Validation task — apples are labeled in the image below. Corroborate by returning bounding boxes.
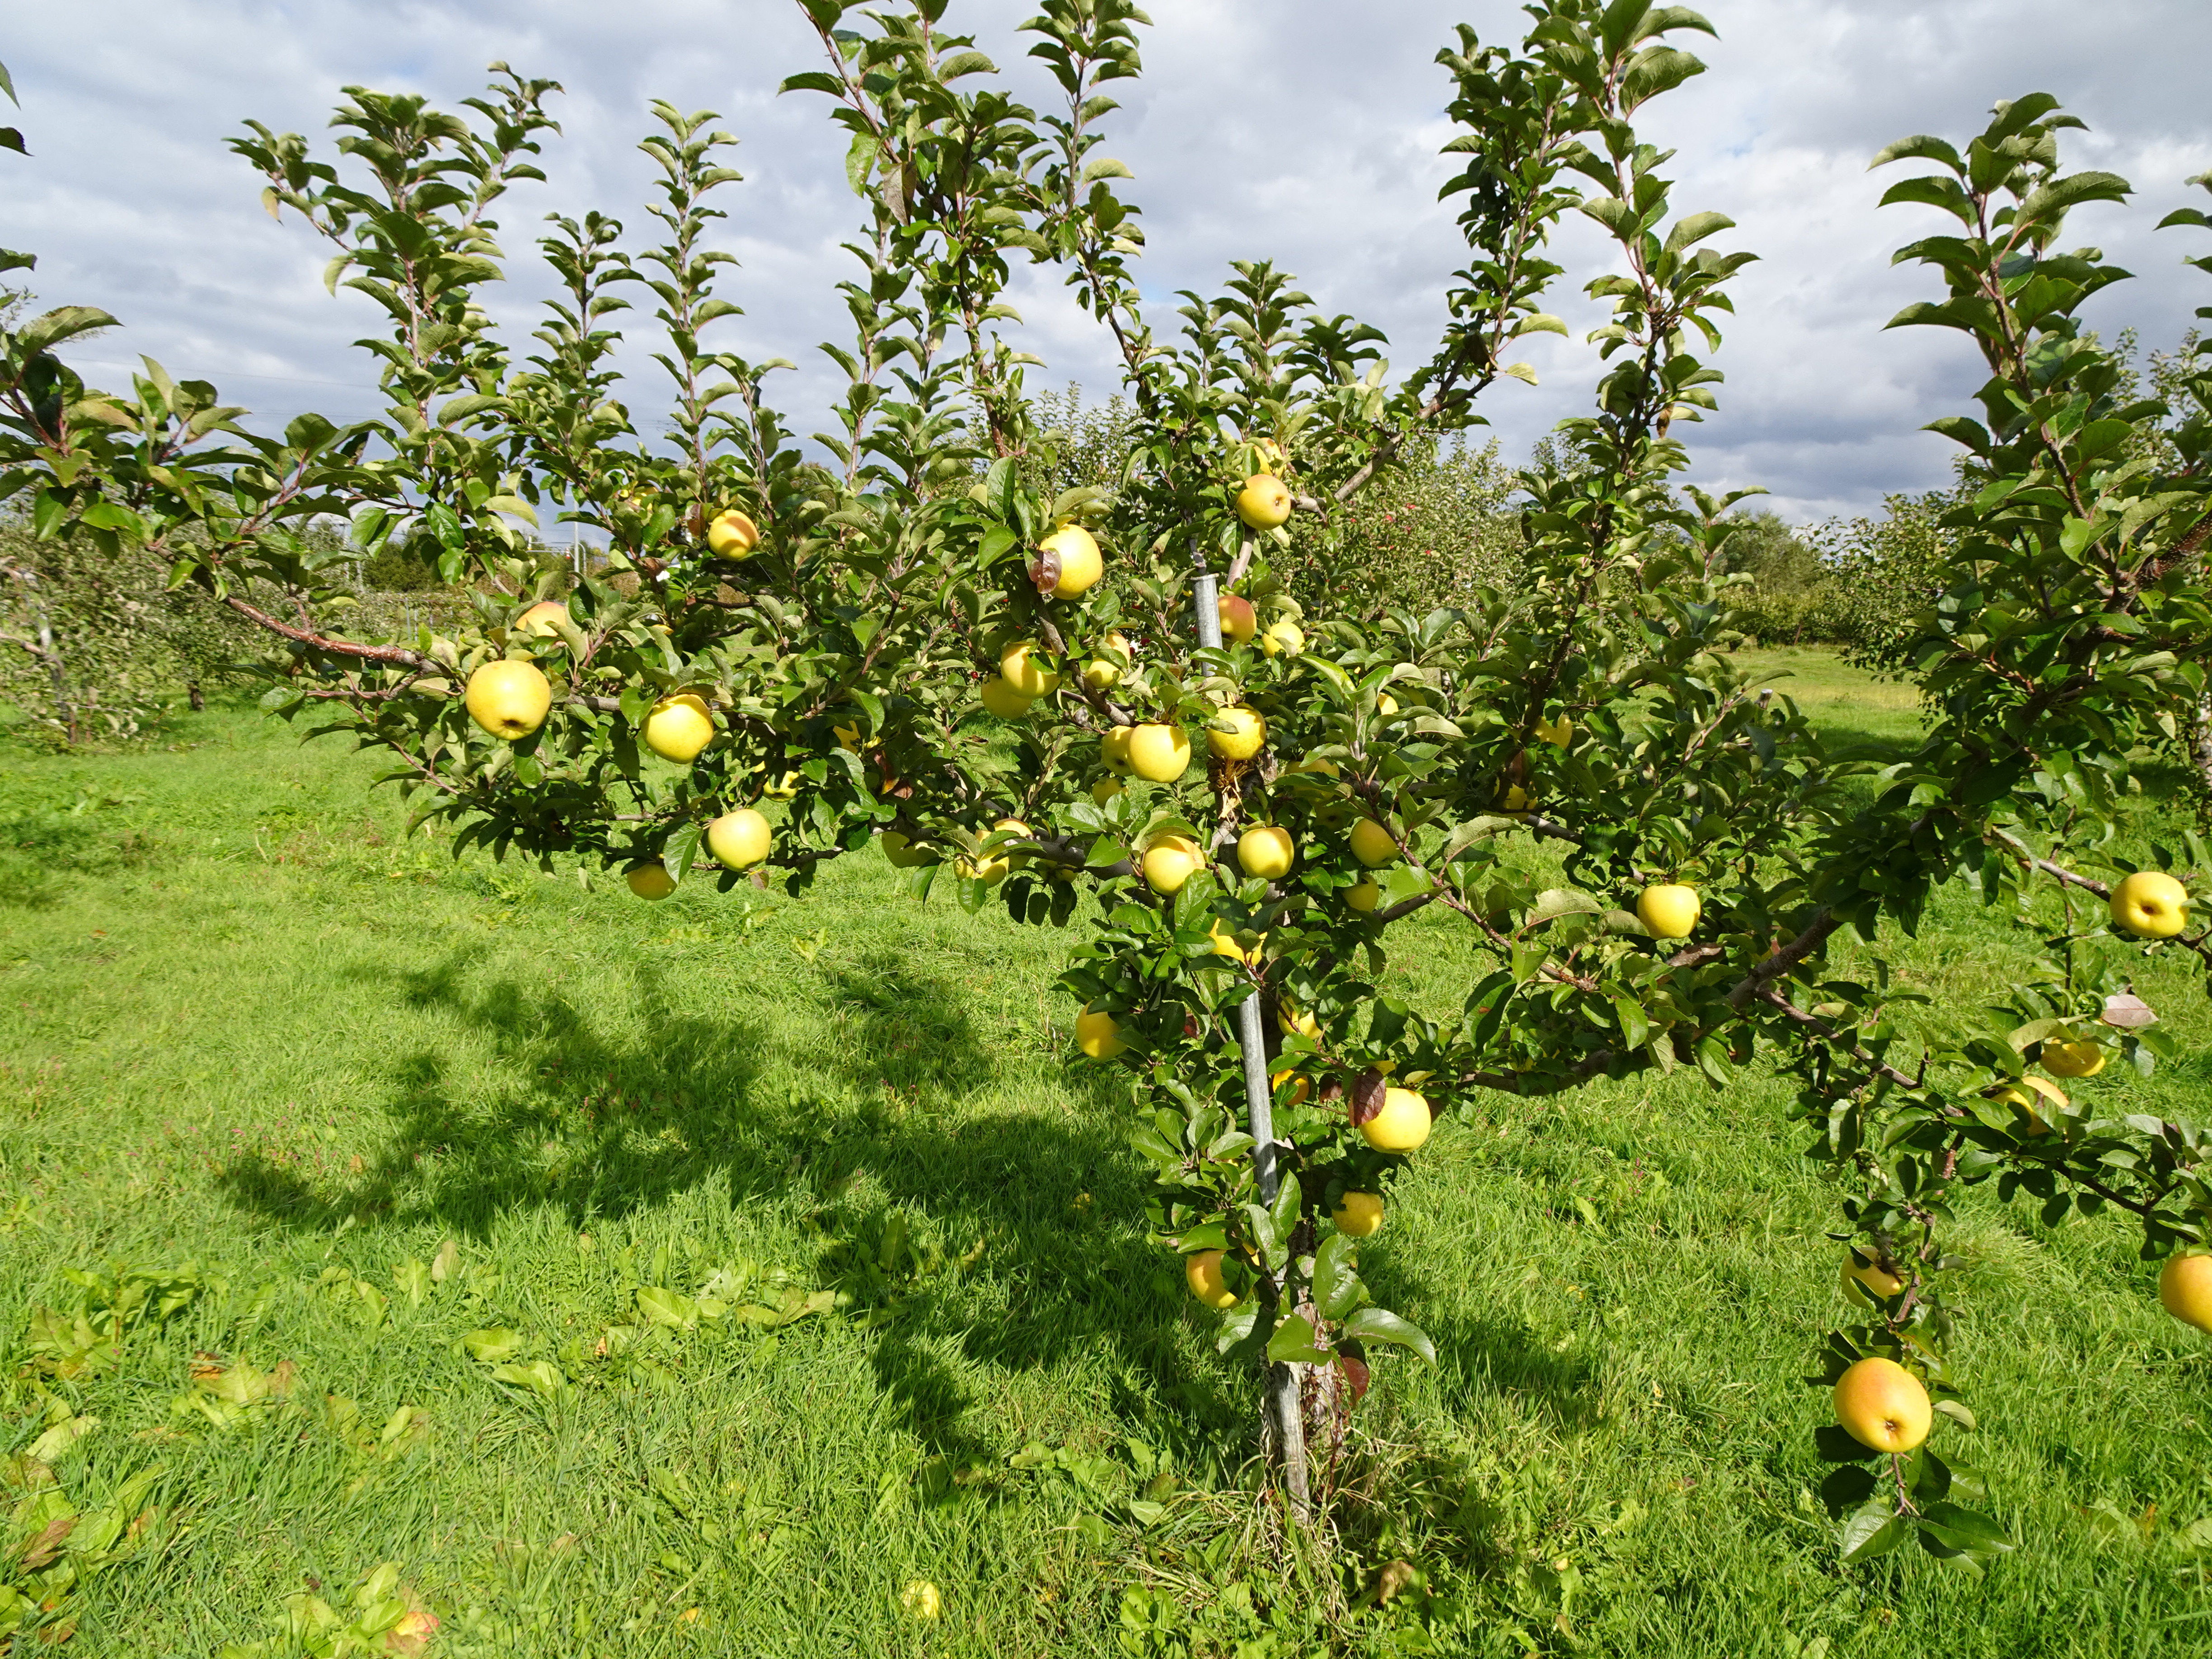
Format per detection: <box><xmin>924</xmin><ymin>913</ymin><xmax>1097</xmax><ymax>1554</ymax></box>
<box><xmin>1129</xmin><ymin>722</ymin><xmax>1191</xmax><ymax>784</ymax></box>
<box><xmin>516</xmin><ymin>601</ymin><xmax>566</xmax><ymax>638</ymax></box>
<box><xmin>620</xmin><ymin>486</ymin><xmax>657</xmax><ymax>514</ymax></box>
<box><xmin>954</xmin><ymin>830</ymin><xmax>1009</xmax><ymax>887</ymax></box>
<box><xmin>1001</xmin><ymin>642</ymin><xmax>1060</xmax><ymax>699</ymax></box>
<box><xmin>1535</xmin><ymin>714</ymin><xmax>1572</xmax><ymax>750</ymax></box>
<box><xmin>1360</xmin><ymin>1088</ymin><xmax>1431</xmax><ymax>1154</ymax></box>
<box><xmin>1143</xmin><ymin>836</ymin><xmax>1206</xmax><ymax>897</ymax></box>
<box><xmin>1637</xmin><ymin>885</ymin><xmax>1701</xmax><ymax>940</ymax></box>
<box><xmin>1218</xmin><ymin>595</ymin><xmax>1257</xmax><ymax>645</ymax></box>
<box><xmin>1284</xmin><ymin>759</ymin><xmax>1339</xmax><ymax>805</ymax></box>
<box><xmin>1038</xmin><ymin>859</ymin><xmax>1077</xmax><ymax>882</ymax></box>
<box><xmin>466</xmin><ymin>660</ymin><xmax>552</xmax><ymax>740</ymax></box>
<box><xmin>1253</xmin><ymin>438</ymin><xmax>1287</xmax><ymax>479</ymax></box>
<box><xmin>708</xmin><ymin>509</ymin><xmax>759</xmax><ymax>561</ymax></box>
<box><xmin>992</xmin><ymin>818</ymin><xmax>1034</xmax><ymax>871</ymax></box>
<box><xmin>882</xmin><ymin>831</ymin><xmax>940</xmax><ymax>868</ymax></box>
<box><xmin>1331</xmin><ymin>1192</ymin><xmax>1384</xmax><ymax>1237</ymax></box>
<box><xmin>1263</xmin><ymin>622</ymin><xmax>1305</xmax><ymax>659</ymax></box>
<box><xmin>1086</xmin><ymin>632</ymin><xmax>1130</xmax><ymax>685</ymax></box>
<box><xmin>1237</xmin><ymin>827</ymin><xmax>1294</xmax><ymax>880</ymax></box>
<box><xmin>1207</xmin><ymin>911</ymin><xmax>1267</xmax><ymax>966</ymax></box>
<box><xmin>708</xmin><ymin>809</ymin><xmax>772</xmax><ymax>872</ymax></box>
<box><xmin>1187</xmin><ymin>1243</ymin><xmax>1260</xmax><ymax>1309</ymax></box>
<box><xmin>981</xmin><ymin>674</ymin><xmax>1032</xmax><ymax>719</ymax></box>
<box><xmin>2160</xmin><ymin>1250</ymin><xmax>2212</xmax><ymax>1335</ymax></box>
<box><xmin>628</xmin><ymin>854</ymin><xmax>677</xmax><ymax>901</ymax></box>
<box><xmin>1834</xmin><ymin>1357</ymin><xmax>1932</xmax><ymax>1453</ymax></box>
<box><xmin>1076</xmin><ymin>999</ymin><xmax>1128</xmax><ymax>1061</ymax></box>
<box><xmin>1039</xmin><ymin>524</ymin><xmax>1103</xmax><ymax>600</ymax></box>
<box><xmin>1898</xmin><ymin>632</ymin><xmax>1904</xmax><ymax>638</ymax></box>
<box><xmin>833</xmin><ymin>721</ymin><xmax>861</xmax><ymax>756</ymax></box>
<box><xmin>1378</xmin><ymin>692</ymin><xmax>1398</xmax><ymax>715</ymax></box>
<box><xmin>754</xmin><ymin>760</ymin><xmax>801</xmax><ymax>803</ymax></box>
<box><xmin>1207</xmin><ymin>706</ymin><xmax>1266</xmax><ymax>761</ymax></box>
<box><xmin>1491</xmin><ymin>777</ymin><xmax>1538</xmax><ymax>823</ymax></box>
<box><xmin>1102</xmin><ymin>725</ymin><xmax>1134</xmax><ymax>777</ymax></box>
<box><xmin>1278</xmin><ymin>996</ymin><xmax>1323</xmax><ymax>1040</ymax></box>
<box><xmin>1989</xmin><ymin>1077</ymin><xmax>2068</xmax><ymax>1137</ymax></box>
<box><xmin>1236</xmin><ymin>474</ymin><xmax>1291</xmax><ymax>530</ymax></box>
<box><xmin>1350</xmin><ymin>818</ymin><xmax>1400</xmax><ymax>868</ymax></box>
<box><xmin>1343</xmin><ymin>874</ymin><xmax>1379</xmax><ymax>913</ymax></box>
<box><xmin>1093</xmin><ymin>777</ymin><xmax>1129</xmax><ymax>811</ymax></box>
<box><xmin>2040</xmin><ymin>1035</ymin><xmax>2106</xmax><ymax>1078</ymax></box>
<box><xmin>642</xmin><ymin>694</ymin><xmax>714</xmax><ymax>764</ymax></box>
<box><xmin>1315</xmin><ymin>807</ymin><xmax>1352</xmax><ymax>832</ymax></box>
<box><xmin>2110</xmin><ymin>872</ymin><xmax>2189</xmax><ymax>938</ymax></box>
<box><xmin>1841</xmin><ymin>1247</ymin><xmax>1905</xmax><ymax>1309</ymax></box>
<box><xmin>1218</xmin><ymin>1159</ymin><xmax>1240</xmax><ymax>1168</ymax></box>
